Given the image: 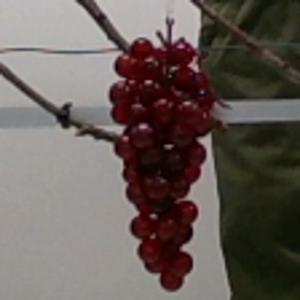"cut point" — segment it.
Wrapping results in <instances>:
<instances>
[{"label":"cut point","mask_w":300,"mask_h":300,"mask_svg":"<svg viewBox=\"0 0 300 300\" xmlns=\"http://www.w3.org/2000/svg\"><path fill=\"white\" fill-rule=\"evenodd\" d=\"M176 18L172 14V0H166V14L164 16V26L166 29V47L169 49L173 43V28Z\"/></svg>","instance_id":"cut-point-1"}]
</instances>
